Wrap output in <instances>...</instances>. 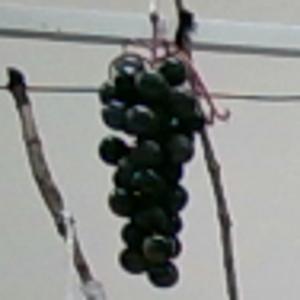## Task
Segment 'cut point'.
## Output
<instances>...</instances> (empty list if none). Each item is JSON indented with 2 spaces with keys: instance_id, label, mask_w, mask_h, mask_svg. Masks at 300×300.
I'll use <instances>...</instances> for the list:
<instances>
[{
  "instance_id": "6a23745f",
  "label": "cut point",
  "mask_w": 300,
  "mask_h": 300,
  "mask_svg": "<svg viewBox=\"0 0 300 300\" xmlns=\"http://www.w3.org/2000/svg\"><path fill=\"white\" fill-rule=\"evenodd\" d=\"M147 19L151 26V56L150 65L153 69L159 65L158 61V32L160 28V13L158 10V0H149V12Z\"/></svg>"
}]
</instances>
